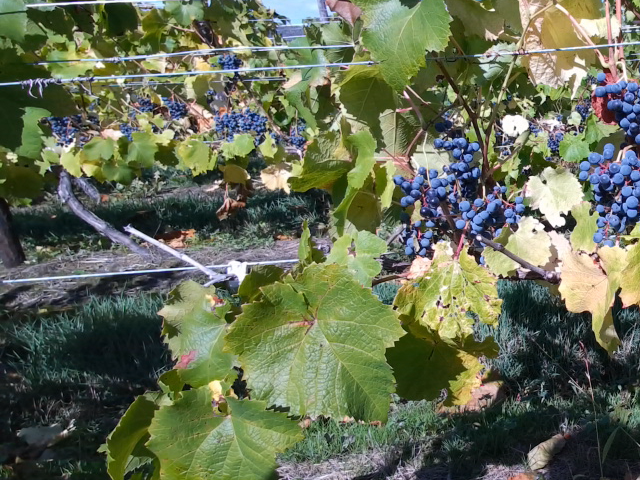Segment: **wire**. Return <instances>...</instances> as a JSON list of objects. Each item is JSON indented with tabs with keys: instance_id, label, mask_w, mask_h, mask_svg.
Returning a JSON list of instances; mask_svg holds the SVG:
<instances>
[{
	"instance_id": "wire-4",
	"label": "wire",
	"mask_w": 640,
	"mask_h": 480,
	"mask_svg": "<svg viewBox=\"0 0 640 480\" xmlns=\"http://www.w3.org/2000/svg\"><path fill=\"white\" fill-rule=\"evenodd\" d=\"M196 265H189L184 267H164L158 269H138L135 271H127V272H100V273H83L80 275H56L49 276L44 278H16L14 280H4L0 279V284L2 285H16L18 283L23 284H31V283H46L51 281H59V280H82L86 278H103V277H129V276H137L141 274H161L167 272H186L191 270H196Z\"/></svg>"
},
{
	"instance_id": "wire-5",
	"label": "wire",
	"mask_w": 640,
	"mask_h": 480,
	"mask_svg": "<svg viewBox=\"0 0 640 480\" xmlns=\"http://www.w3.org/2000/svg\"><path fill=\"white\" fill-rule=\"evenodd\" d=\"M283 263H295V264H298L299 263V259L298 258H281V259H271V260H268V261L249 260L247 262V265L248 266H252V265L270 266V265H274V264H283Z\"/></svg>"
},
{
	"instance_id": "wire-1",
	"label": "wire",
	"mask_w": 640,
	"mask_h": 480,
	"mask_svg": "<svg viewBox=\"0 0 640 480\" xmlns=\"http://www.w3.org/2000/svg\"><path fill=\"white\" fill-rule=\"evenodd\" d=\"M374 65L373 59L362 60H337L334 62H314L308 64H282L266 67H224L215 69H202L181 71L176 73H119L112 75H96V76H79V77H63L52 79H40V80H10L0 82V87H8L12 85H42V84H55L65 82H81V81H98V80H114L121 78H179L183 76L205 75V74H218L226 72H268L284 69H311L317 67H336L340 65Z\"/></svg>"
},
{
	"instance_id": "wire-2",
	"label": "wire",
	"mask_w": 640,
	"mask_h": 480,
	"mask_svg": "<svg viewBox=\"0 0 640 480\" xmlns=\"http://www.w3.org/2000/svg\"><path fill=\"white\" fill-rule=\"evenodd\" d=\"M313 50H337V49H352V44H338V43H307V44H295V45H282V46H229L221 48H207L196 49L190 51H178L169 53H157V54H139L135 56H115V57H81V58H54L34 60L29 62V66L56 63H83V62H117V61H137L141 59H159V58H172L180 56H193L198 54L209 53H223L231 51H284V50H297V49H310Z\"/></svg>"
},
{
	"instance_id": "wire-3",
	"label": "wire",
	"mask_w": 640,
	"mask_h": 480,
	"mask_svg": "<svg viewBox=\"0 0 640 480\" xmlns=\"http://www.w3.org/2000/svg\"><path fill=\"white\" fill-rule=\"evenodd\" d=\"M619 46L629 47V46H640V41H627L622 43H600V44H590V45H569L562 47H554V48H539V49H525V50H503L497 52H483L479 54H470V55H458L453 57H442V56H427V61H435L436 59L441 60L442 62H455L460 60H472V59H481L486 57H500L506 55H528V54H541V53H556V52H565L571 50H592V49H602V48H618Z\"/></svg>"
}]
</instances>
